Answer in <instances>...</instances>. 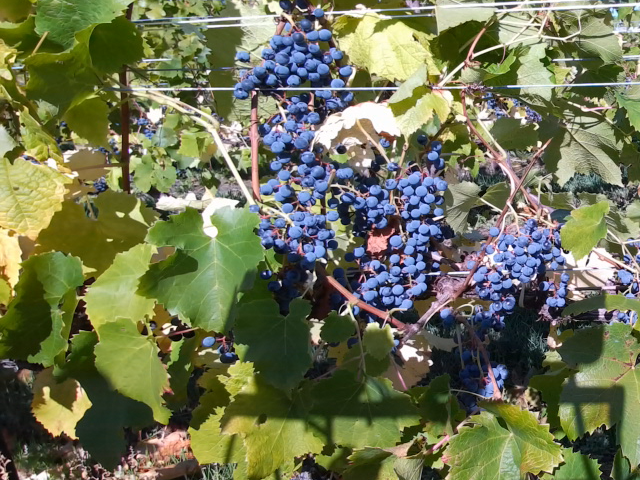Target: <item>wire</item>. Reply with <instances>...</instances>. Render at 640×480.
<instances>
[{
  "label": "wire",
  "mask_w": 640,
  "mask_h": 480,
  "mask_svg": "<svg viewBox=\"0 0 640 480\" xmlns=\"http://www.w3.org/2000/svg\"><path fill=\"white\" fill-rule=\"evenodd\" d=\"M570 0H517L509 2L498 3H444L438 4V9L446 8H494L493 14L499 12H518V13H530L535 11H575L578 9H602V8H627V7H640V2H625V3H600V4H576L573 6H533L539 3L546 4H561L569 3Z\"/></svg>",
  "instance_id": "d2f4af69"
},
{
  "label": "wire",
  "mask_w": 640,
  "mask_h": 480,
  "mask_svg": "<svg viewBox=\"0 0 640 480\" xmlns=\"http://www.w3.org/2000/svg\"><path fill=\"white\" fill-rule=\"evenodd\" d=\"M108 91L111 93H135V92H145V93H177V92H186V93H198L202 91H211V92H232V87H213V86H200L196 88H188V87H175V88H147V87H133V88H113L109 87Z\"/></svg>",
  "instance_id": "34cfc8c6"
},
{
  "label": "wire",
  "mask_w": 640,
  "mask_h": 480,
  "mask_svg": "<svg viewBox=\"0 0 640 480\" xmlns=\"http://www.w3.org/2000/svg\"><path fill=\"white\" fill-rule=\"evenodd\" d=\"M257 92L263 91H330L334 93H346L348 91H399L398 86H339L338 88L332 86H256Z\"/></svg>",
  "instance_id": "a009ed1b"
},
{
  "label": "wire",
  "mask_w": 640,
  "mask_h": 480,
  "mask_svg": "<svg viewBox=\"0 0 640 480\" xmlns=\"http://www.w3.org/2000/svg\"><path fill=\"white\" fill-rule=\"evenodd\" d=\"M433 5H419L410 8H374V9H359V10H334V11H325V16H336V15H357V14H380V19L385 20H404V19H416V18H425L432 17V12H423V13H414V14H402V15H387L384 13H412L421 10H433Z\"/></svg>",
  "instance_id": "f0478fcc"
},
{
  "label": "wire",
  "mask_w": 640,
  "mask_h": 480,
  "mask_svg": "<svg viewBox=\"0 0 640 480\" xmlns=\"http://www.w3.org/2000/svg\"><path fill=\"white\" fill-rule=\"evenodd\" d=\"M279 14L274 15H251V16H238V17H226V16H213L202 20H180V21H154L148 20L143 22H137V27L145 26H173L174 30H183L189 28H209V29H249L260 26H279V21H264V20H276L279 19ZM258 22L247 24H212L215 21L224 22H240V21H253Z\"/></svg>",
  "instance_id": "a73af890"
},
{
  "label": "wire",
  "mask_w": 640,
  "mask_h": 480,
  "mask_svg": "<svg viewBox=\"0 0 640 480\" xmlns=\"http://www.w3.org/2000/svg\"><path fill=\"white\" fill-rule=\"evenodd\" d=\"M640 86V81H614V82H590V81H557L543 85H463L454 87L428 86L430 92H456L465 90H545L559 86H588V87H616V86Z\"/></svg>",
  "instance_id": "4f2155b8"
}]
</instances>
